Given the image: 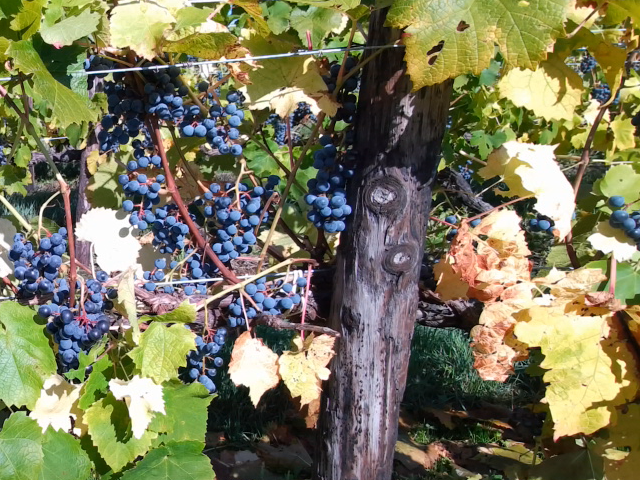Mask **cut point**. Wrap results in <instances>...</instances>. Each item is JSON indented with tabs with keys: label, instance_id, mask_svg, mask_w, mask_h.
Here are the masks:
<instances>
[{
	"label": "cut point",
	"instance_id": "obj_1",
	"mask_svg": "<svg viewBox=\"0 0 640 480\" xmlns=\"http://www.w3.org/2000/svg\"><path fill=\"white\" fill-rule=\"evenodd\" d=\"M61 193H62V190H61V189H58V190H56V191H53V192L51 193V195H49V196L47 197V199H45V200L43 201V203H42V205H41V209H40L39 214H38V224H39V225H42V224H43V217H44V214H45V212H46V207H47V205H48V204H49V203H50V202H51V201H52L56 196H59Z\"/></svg>",
	"mask_w": 640,
	"mask_h": 480
},
{
	"label": "cut point",
	"instance_id": "obj_2",
	"mask_svg": "<svg viewBox=\"0 0 640 480\" xmlns=\"http://www.w3.org/2000/svg\"><path fill=\"white\" fill-rule=\"evenodd\" d=\"M73 278H76L79 281V286L81 288V297H80V302L84 303L86 300V286L84 284V279L83 277L78 274V273H73L72 274Z\"/></svg>",
	"mask_w": 640,
	"mask_h": 480
}]
</instances>
